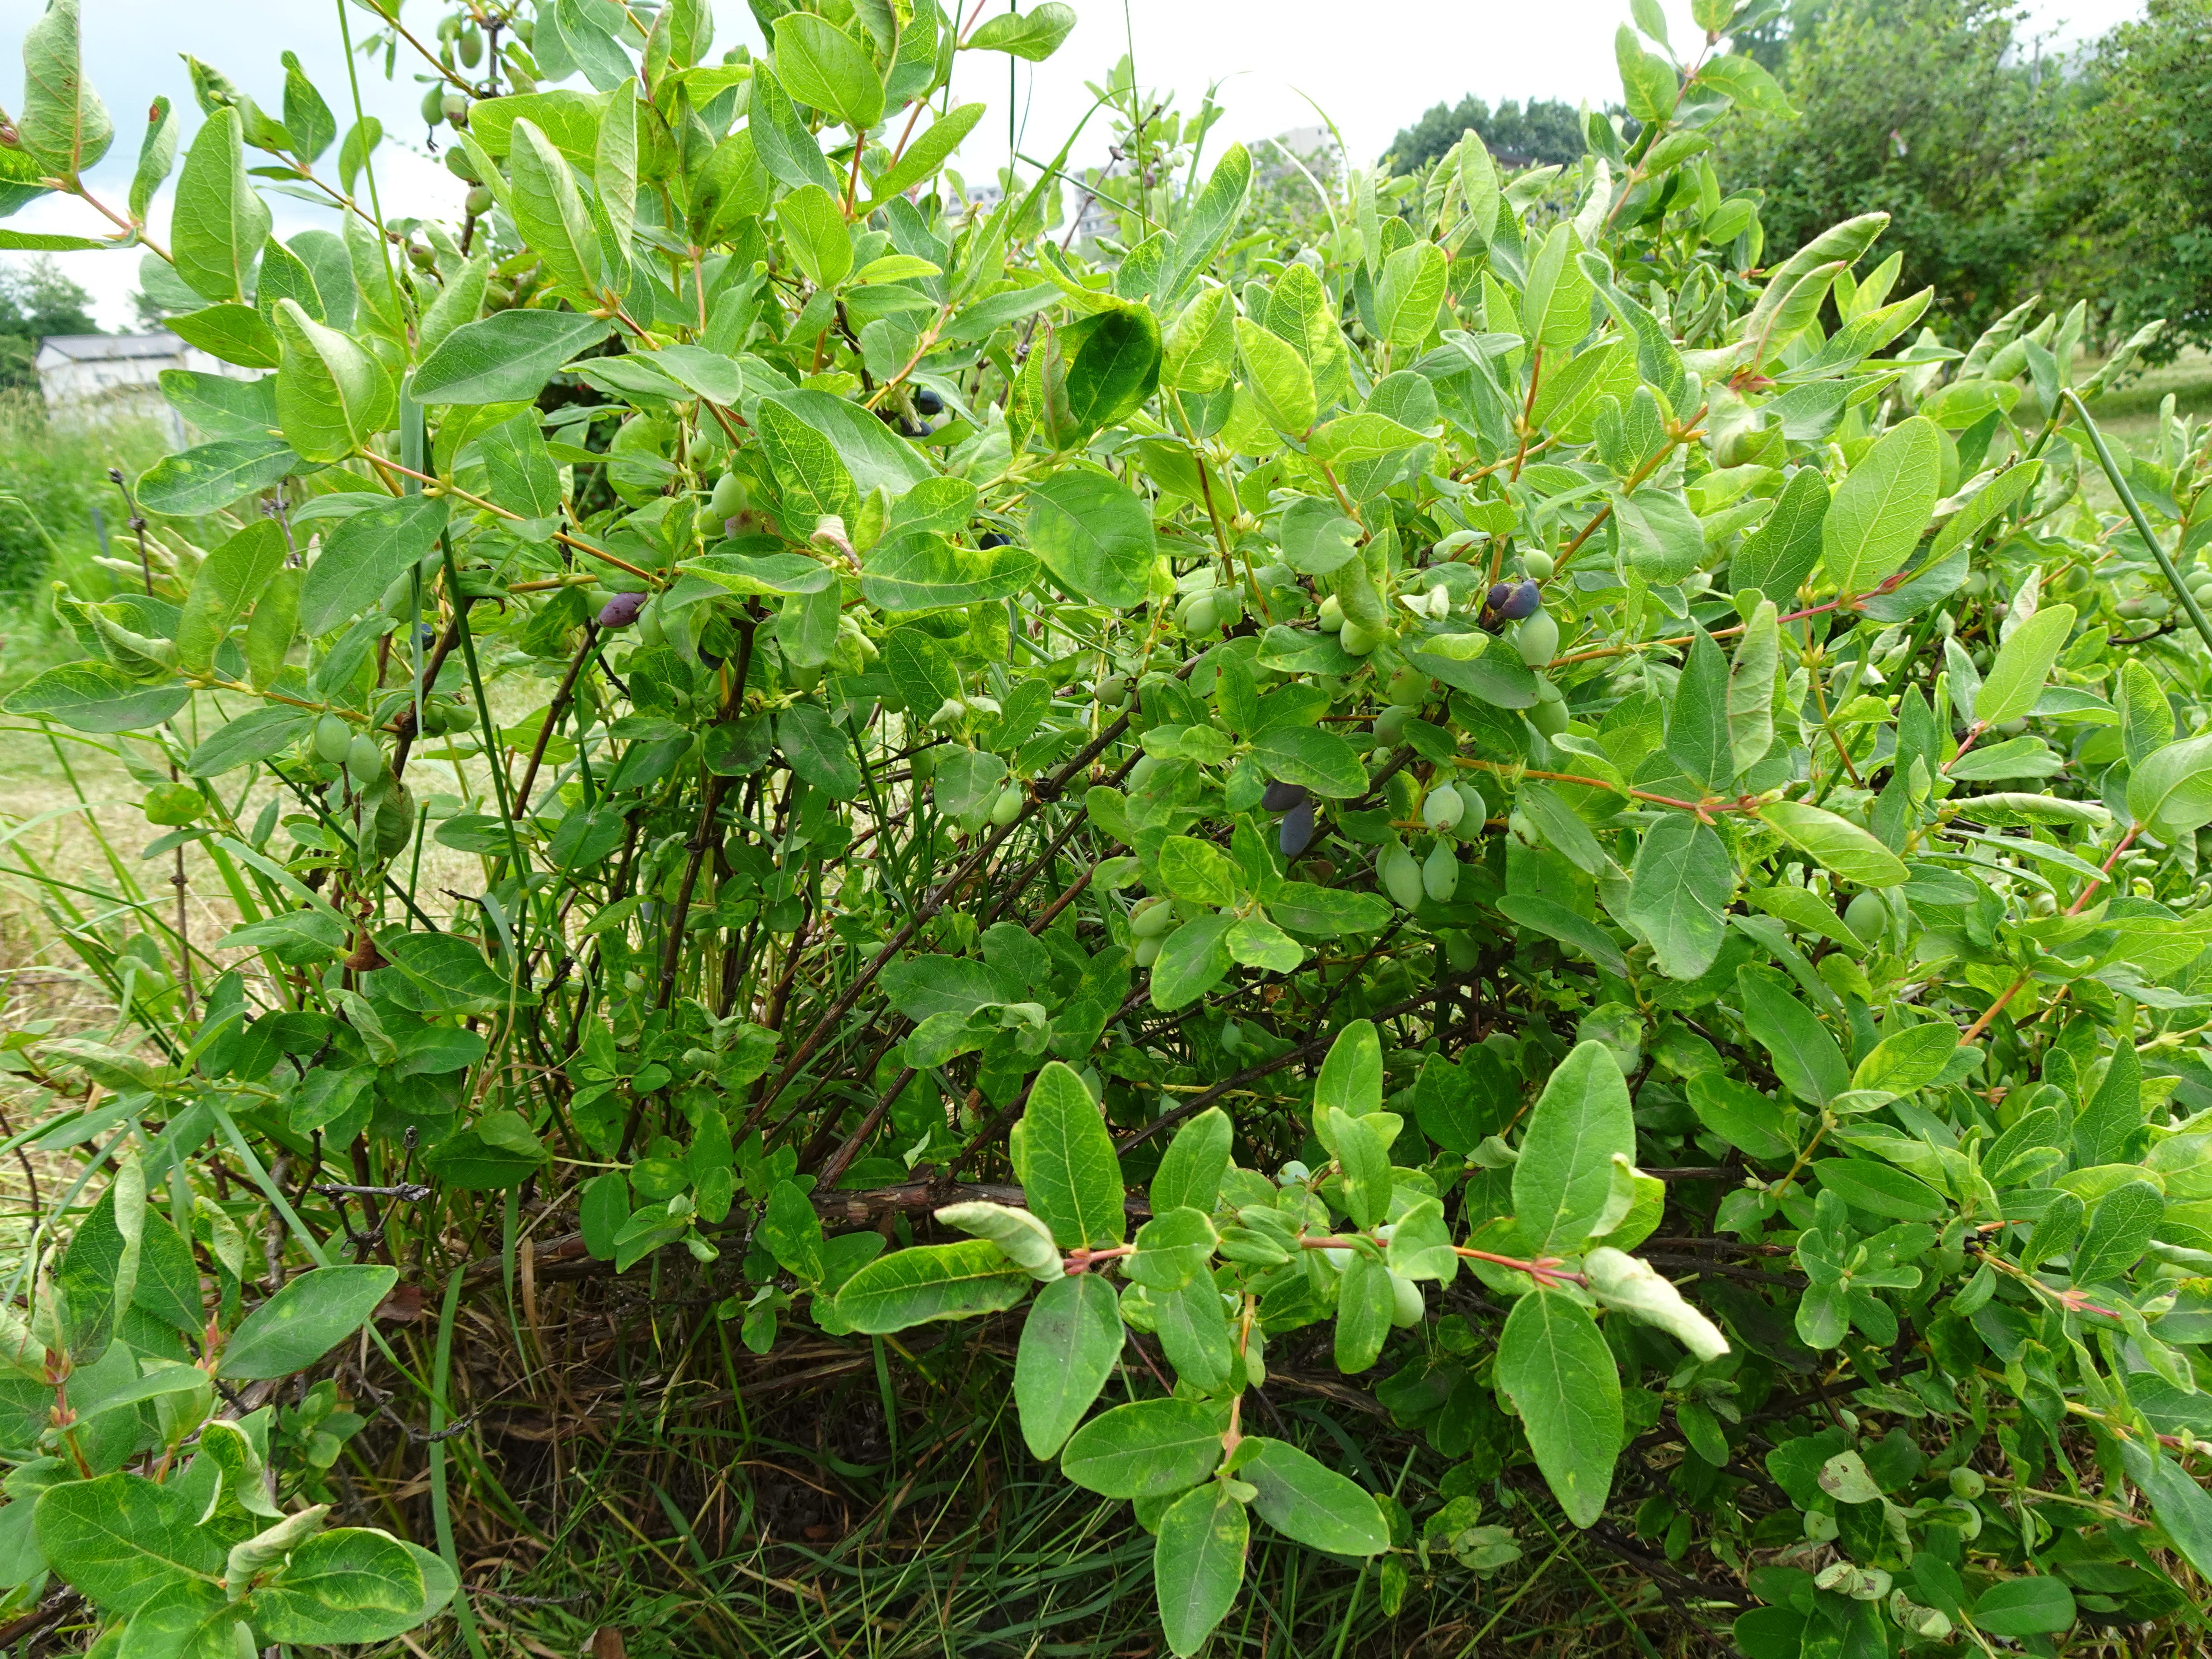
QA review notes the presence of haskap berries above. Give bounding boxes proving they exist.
[2194,583,2212,608]
[710,470,747,522]
[1507,807,1545,849]
[1173,589,1210,632]
[640,596,675,644]
[840,614,862,636]
[512,19,538,43]
[1521,548,1555,583]
[1423,775,1460,837]
[1066,1059,1085,1074]
[1844,890,1885,947]
[1369,1265,1421,1330]
[2116,598,2144,619]
[1078,1066,1103,1109]
[1386,662,1431,706]
[439,96,468,123]
[2139,597,2169,618]
[437,9,460,43]
[877,407,892,426]
[1278,1159,1311,1186]
[600,589,649,627]
[1046,763,1076,787]
[912,391,944,414]
[1278,800,1325,857]
[1454,782,1493,843]
[1263,766,1312,807]
[1804,1511,1840,1542]
[2184,570,2212,595]
[1424,837,1461,904]
[901,415,933,437]
[1157,1096,1191,1138]
[409,623,437,653]
[977,530,1004,550]
[1134,933,1169,969]
[423,706,446,739]
[421,80,444,125]
[1324,1246,1355,1269]
[1502,582,1540,615]
[1557,939,1579,960]
[2176,607,2199,627]
[1949,1467,1985,1500]
[1377,841,1410,884]
[690,431,715,474]
[1128,895,1178,938]
[1372,704,1410,747]
[446,704,478,732]
[997,532,1011,548]
[1839,1410,1860,1433]
[387,430,404,454]
[349,733,381,781]
[1940,1492,1982,1542]
[1317,593,1346,633]
[1444,929,1479,973]
[1220,1018,1243,1058]
[725,506,763,539]
[1375,1225,1401,1241]
[467,187,493,217]
[680,731,702,765]
[835,621,880,677]
[856,941,886,956]
[698,504,726,536]
[1486,584,1505,611]
[1096,665,1135,709]
[312,712,352,768]
[1515,609,1556,668]
[1386,839,1428,914]
[986,783,1023,827]
[1070,775,1092,793]
[1961,571,1986,596]
[460,18,483,69]
[1526,687,1570,737]
[1342,602,1386,653]
[407,243,436,266]
[1181,599,1230,637]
